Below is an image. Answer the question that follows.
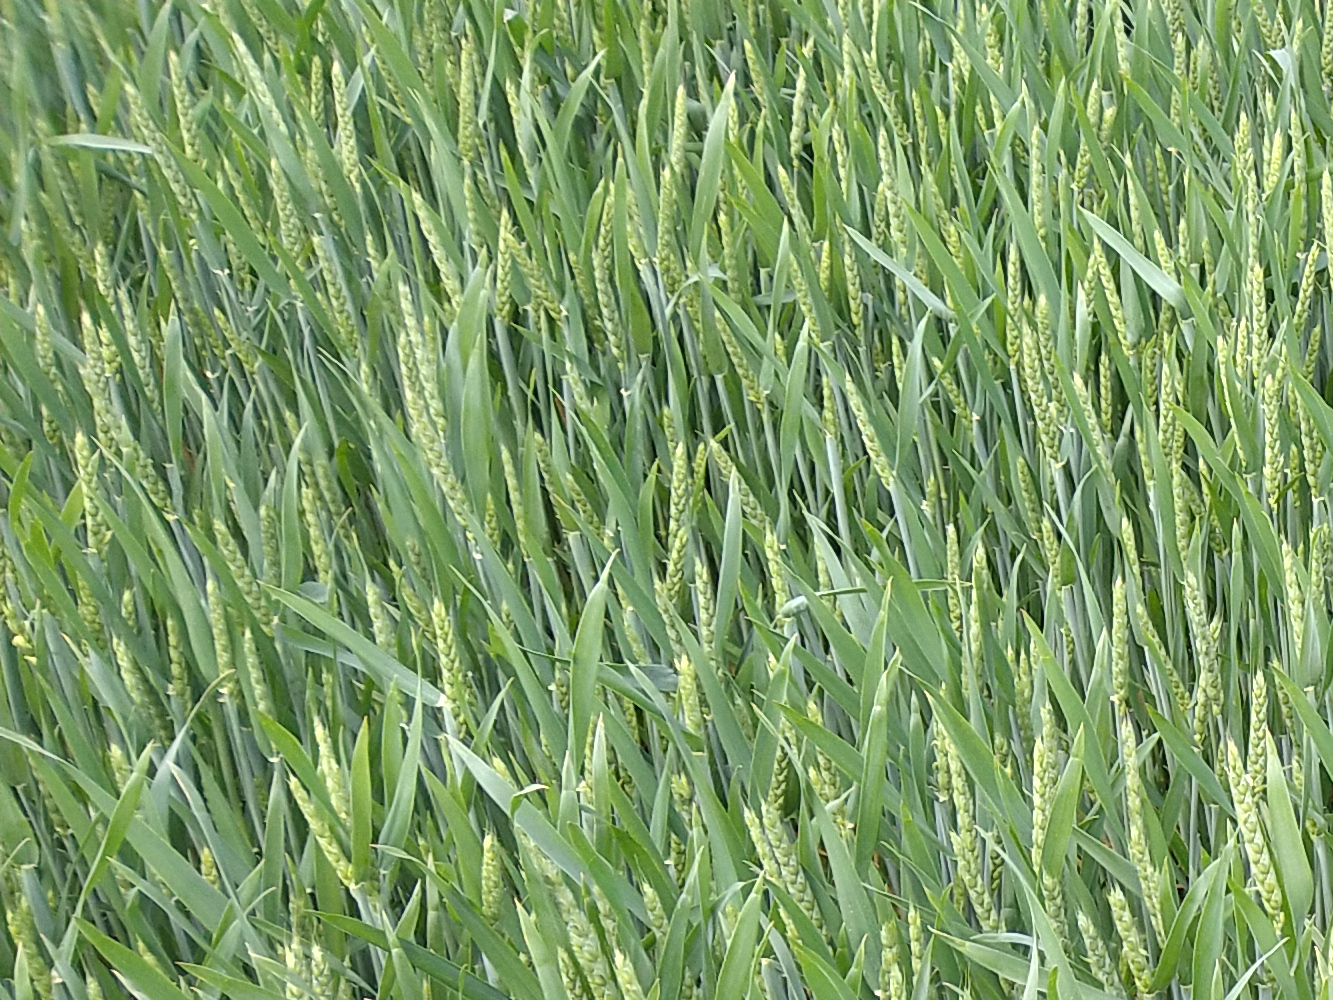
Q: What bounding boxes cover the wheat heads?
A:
[308,944,337,1000]
[1301,325,1324,387]
[166,612,186,700]
[1296,384,1331,487]
[36,120,80,220]
[949,832,1023,1000]
[200,846,218,888]
[423,5,461,99]
[495,214,513,303]
[491,759,517,791]
[1262,126,1269,190]
[620,600,641,663]
[261,499,281,580]
[1152,151,1172,225]
[1286,441,1301,498]
[33,216,60,283]
[592,884,619,945]
[308,667,320,724]
[984,20,1001,73]
[553,645,569,719]
[1270,660,1303,748]
[708,304,762,404]
[0,417,31,457]
[96,319,120,390]
[673,257,702,332]
[1002,642,1017,690]
[659,248,679,337]
[1246,670,1265,794]
[90,238,108,297]
[789,42,814,142]
[728,90,735,142]
[1251,266,1267,374]
[601,182,620,262]
[161,250,201,356]
[33,303,59,391]
[552,877,632,1000]
[661,530,695,613]
[1003,678,1036,784]
[285,774,353,885]
[466,20,486,91]
[1324,525,1333,588]
[669,84,686,177]
[386,560,428,643]
[39,398,58,453]
[1071,81,1097,190]
[166,52,206,161]
[906,901,922,987]
[268,157,308,270]
[1190,48,1198,98]
[412,189,465,295]
[589,0,613,47]
[1292,750,1303,805]
[326,669,333,715]
[1291,25,1308,51]
[668,831,688,881]
[111,640,167,744]
[777,163,809,250]
[74,432,103,552]
[507,236,565,325]
[1201,235,1211,279]
[1292,109,1307,195]
[930,701,949,807]
[656,593,683,665]
[696,560,723,676]
[505,74,518,150]
[875,128,910,252]
[526,436,580,530]
[1077,261,1101,312]
[1141,335,1161,406]
[432,605,467,736]
[823,371,831,432]
[1281,532,1310,652]
[1248,196,1258,289]
[218,129,264,232]
[1176,215,1185,267]
[1235,111,1255,196]
[1183,574,1218,709]
[292,107,339,214]
[653,163,694,254]
[241,633,268,716]
[1013,453,1037,536]
[1107,889,1152,991]
[1040,871,1070,957]
[1269,131,1284,190]
[315,450,355,540]
[1108,581,1127,700]
[313,730,355,827]
[815,237,829,305]
[104,743,131,794]
[482,833,498,921]
[1114,22,1127,88]
[786,256,821,343]
[80,370,174,503]
[1121,707,1148,863]
[402,27,439,95]
[291,418,328,506]
[962,543,987,702]
[750,0,757,50]
[669,777,699,834]
[880,185,887,236]
[672,964,710,1000]
[892,274,910,331]
[1327,92,1333,126]
[766,810,830,940]
[675,0,694,37]
[120,582,139,633]
[1017,647,1029,697]
[582,716,611,806]
[1219,737,1281,928]
[1262,376,1294,508]
[1259,11,1289,51]
[340,961,352,1000]
[556,945,605,1000]
[663,442,687,546]
[679,663,702,731]
[720,205,751,307]
[566,473,600,532]
[1313,964,1330,1000]
[23,743,72,830]
[760,698,794,807]
[774,329,787,375]
[399,281,419,363]
[1040,514,1066,601]
[842,373,895,490]
[462,671,483,713]
[116,283,153,395]
[1146,153,1156,200]
[233,33,287,138]
[1189,670,1209,754]
[1020,323,1070,459]
[692,446,707,519]
[844,36,853,86]
[944,728,979,836]
[404,542,438,609]
[284,948,312,1000]
[1291,241,1324,326]
[1070,372,1108,468]
[1007,241,1022,351]
[499,558,513,637]
[502,442,533,550]
[143,283,166,362]
[809,700,839,803]
[454,51,478,165]
[86,88,139,191]
[1032,704,1056,871]
[331,60,355,175]
[7,908,70,1000]
[816,539,833,603]
[205,578,238,703]
[914,87,923,160]
[317,237,355,348]
[364,21,414,125]
[367,580,404,703]
[241,0,292,60]
[841,241,861,338]
[1134,613,1191,720]
[0,585,37,659]
[135,939,164,974]
[395,335,422,419]
[660,406,679,463]
[1100,107,1118,149]
[78,309,116,451]
[863,51,903,131]
[1062,609,1074,672]
[1138,419,1157,492]
[613,952,682,1000]
[1150,229,1174,281]
[414,315,440,426]
[728,151,747,205]
[710,439,774,540]
[1210,48,1225,117]
[1099,350,1112,432]
[743,40,774,111]
[907,232,929,285]
[301,483,333,578]
[810,767,823,813]
[359,349,380,403]
[552,0,569,48]
[406,416,482,552]
[940,220,977,310]
[1171,460,1191,562]
[882,921,902,1000]
[1287,384,1305,453]
[1322,171,1333,308]
[946,521,968,643]
[0,842,23,909]
[465,163,489,249]
[891,334,906,392]
[1238,316,1251,380]
[125,78,200,218]
[1304,531,1327,613]
[589,252,632,371]
[919,164,958,263]
[76,572,100,644]
[743,811,789,928]
[949,56,967,98]
[831,120,849,198]
[213,518,280,629]
[1168,410,1189,463]
[1029,139,1049,256]
[1097,247,1133,367]
[1133,840,1166,944]
[762,532,787,625]
[1119,518,1141,576]
[624,698,636,789]
[315,24,324,135]
[539,722,552,754]
[1077,908,1128,1000]
[613,178,649,257]
[569,250,612,375]
[636,21,649,84]
[1322,24,1333,82]
[426,980,435,1000]
[1013,132,1032,169]
[179,250,226,359]
[643,884,669,937]
[479,493,499,556]
[1159,365,1170,455]
[1047,466,1061,512]
[936,103,945,145]
[499,13,525,88]
[932,355,967,416]
[1169,32,1185,120]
